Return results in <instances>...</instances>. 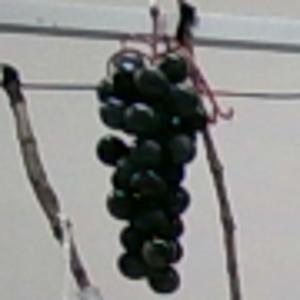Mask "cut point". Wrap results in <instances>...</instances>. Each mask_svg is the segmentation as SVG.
<instances>
[{
	"label": "cut point",
	"mask_w": 300,
	"mask_h": 300,
	"mask_svg": "<svg viewBox=\"0 0 300 300\" xmlns=\"http://www.w3.org/2000/svg\"><path fill=\"white\" fill-rule=\"evenodd\" d=\"M148 15L152 20V49L150 67L157 69L158 26L160 21V0H149Z\"/></svg>",
	"instance_id": "6a23745f"
}]
</instances>
